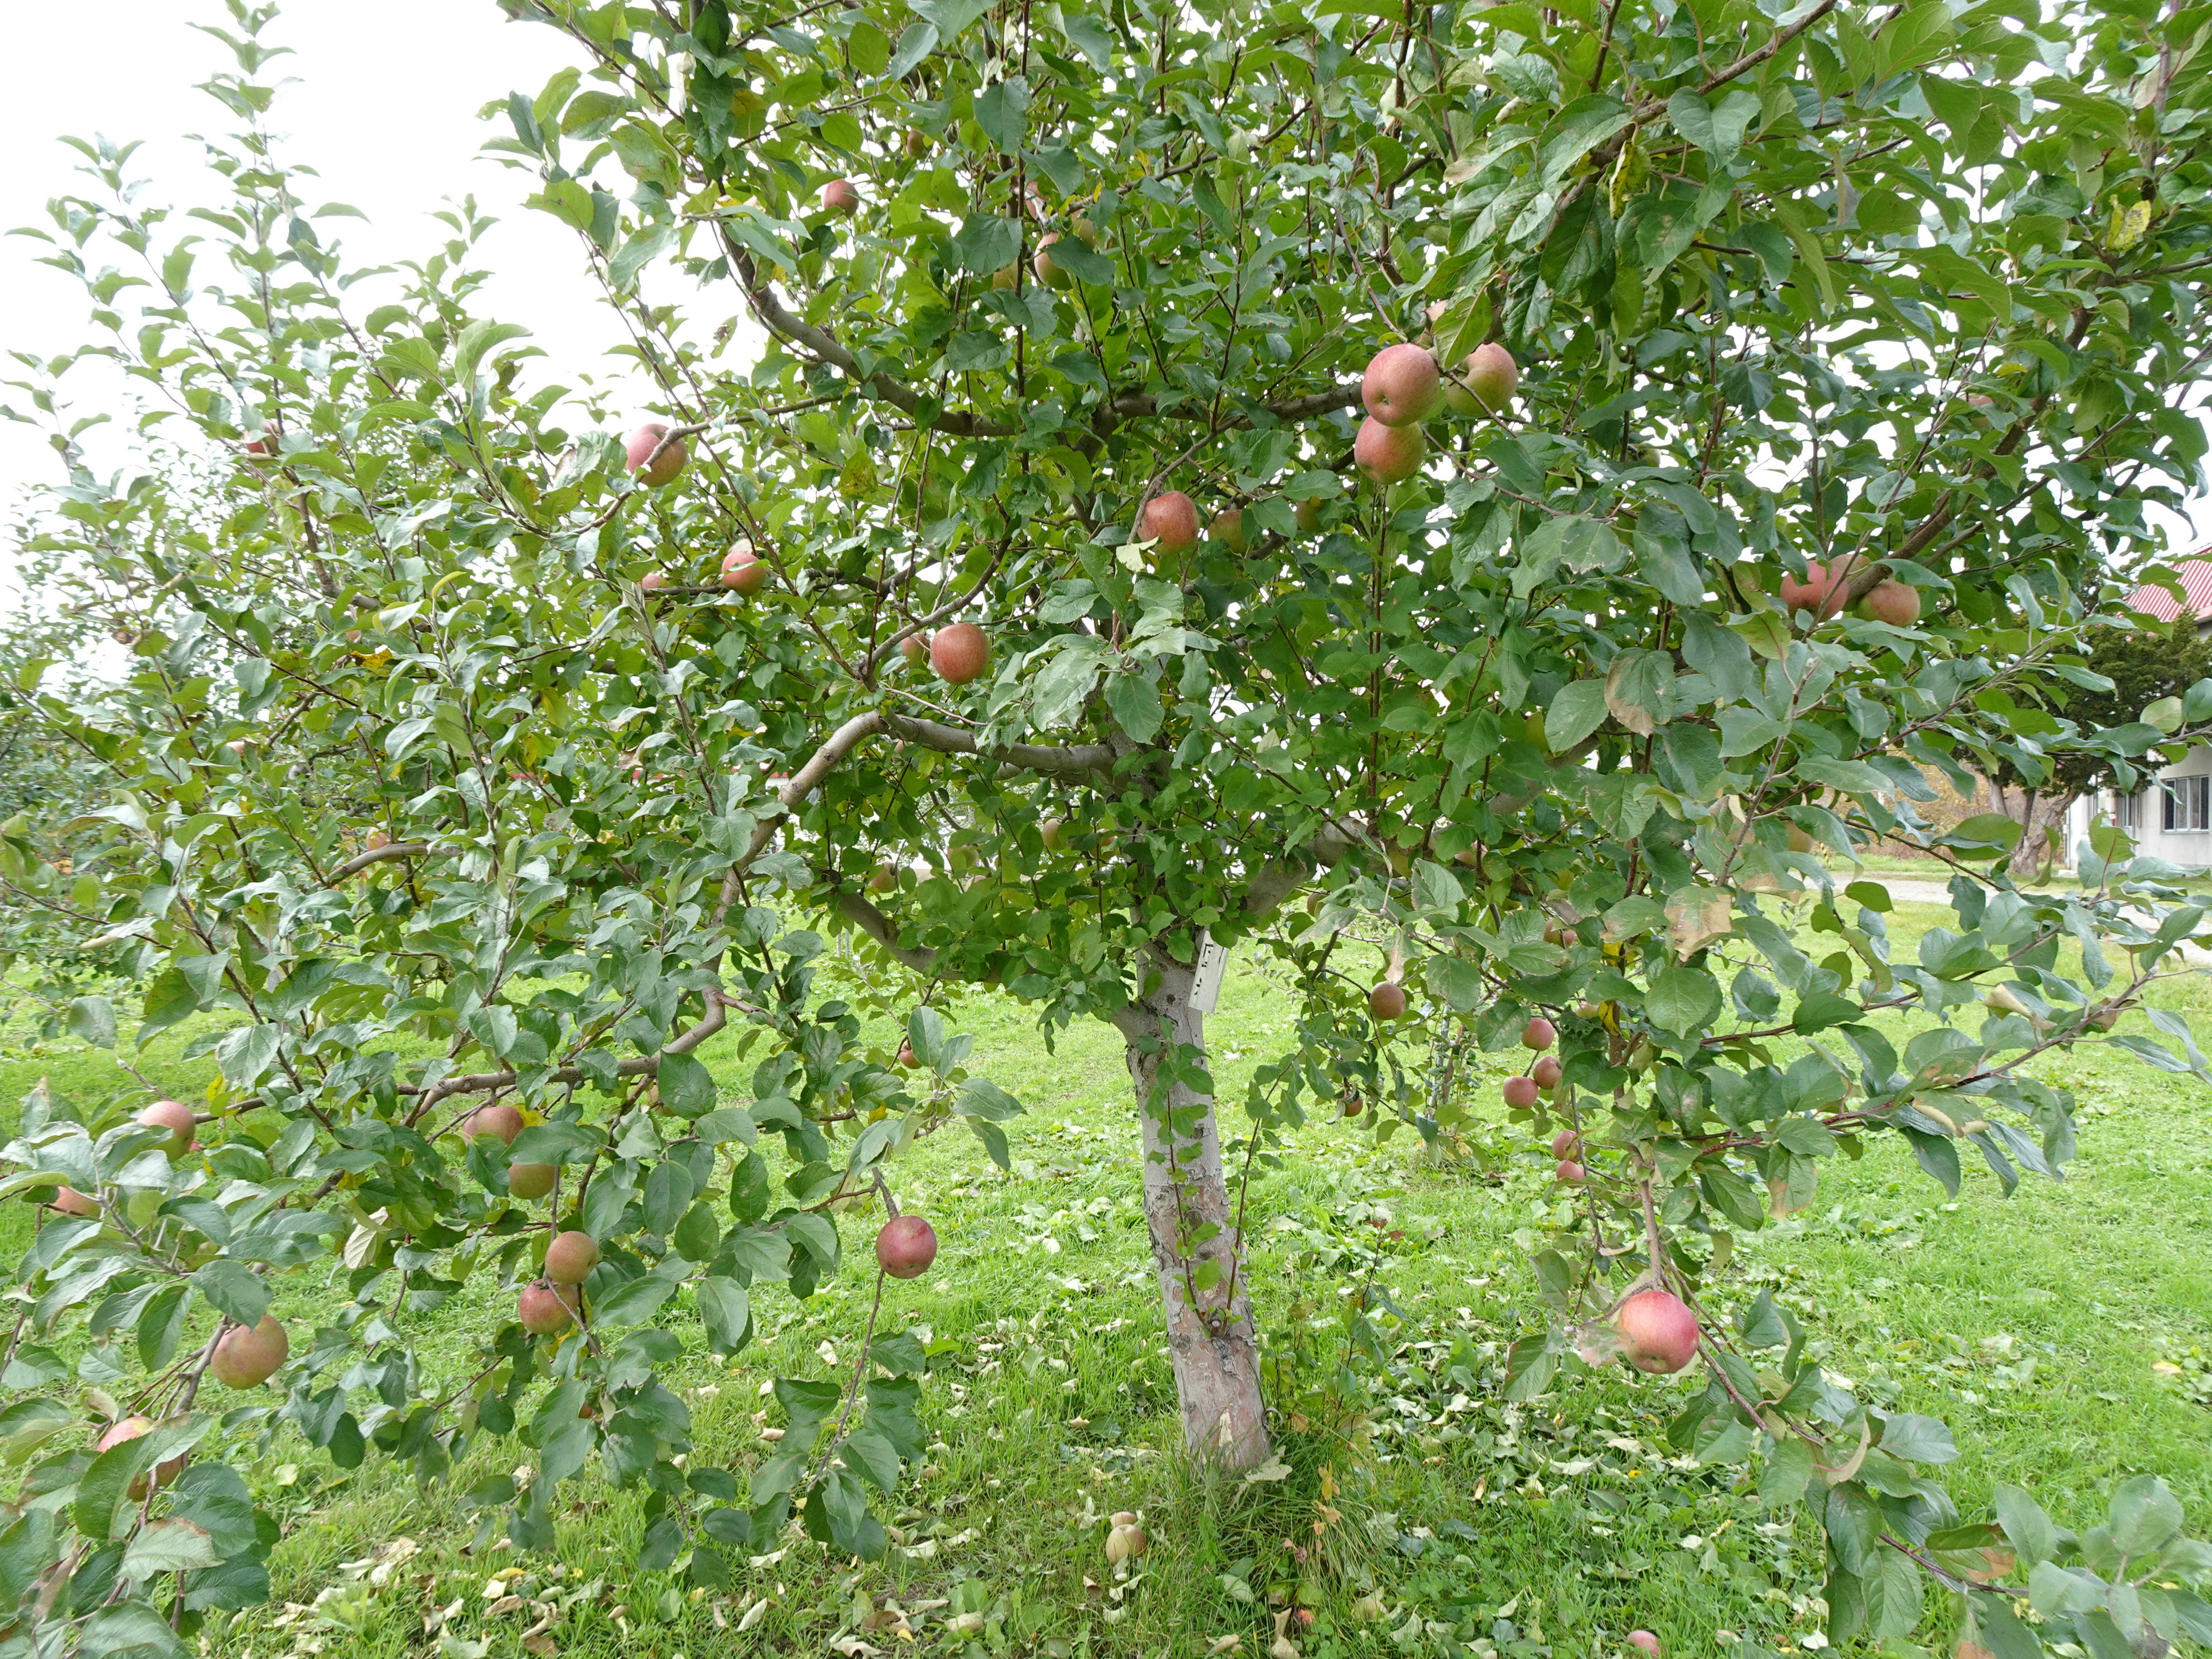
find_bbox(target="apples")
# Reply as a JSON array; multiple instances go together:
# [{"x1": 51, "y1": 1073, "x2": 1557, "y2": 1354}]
[
  {"x1": 1022, "y1": 180, "x2": 1067, "y2": 222},
  {"x1": 720, "y1": 551, "x2": 767, "y2": 595},
  {"x1": 1349, "y1": 774, "x2": 1391, "y2": 810},
  {"x1": 546, "y1": 1230, "x2": 601, "y2": 1287},
  {"x1": 1555, "y1": 1160, "x2": 1586, "y2": 1184},
  {"x1": 92, "y1": 1414, "x2": 184, "y2": 1502},
  {"x1": 1540, "y1": 916, "x2": 1576, "y2": 950},
  {"x1": 1368, "y1": 982, "x2": 1407, "y2": 1021},
  {"x1": 899, "y1": 631, "x2": 931, "y2": 674},
  {"x1": 1305, "y1": 889, "x2": 1337, "y2": 920},
  {"x1": 1616, "y1": 1289, "x2": 1701, "y2": 1376},
  {"x1": 948, "y1": 840, "x2": 980, "y2": 871},
  {"x1": 1293, "y1": 491, "x2": 1339, "y2": 535},
  {"x1": 907, "y1": 125, "x2": 935, "y2": 158},
  {"x1": 1549, "y1": 1128, "x2": 1582, "y2": 1163},
  {"x1": 1134, "y1": 492, "x2": 1200, "y2": 558},
  {"x1": 520, "y1": 1278, "x2": 578, "y2": 1336},
  {"x1": 985, "y1": 260, "x2": 1029, "y2": 303},
  {"x1": 1854, "y1": 580, "x2": 1919, "y2": 633},
  {"x1": 1451, "y1": 840, "x2": 1493, "y2": 871},
  {"x1": 874, "y1": 1215, "x2": 936, "y2": 1280},
  {"x1": 1387, "y1": 824, "x2": 1437, "y2": 881},
  {"x1": 898, "y1": 1038, "x2": 929, "y2": 1071},
  {"x1": 241, "y1": 417, "x2": 285, "y2": 461},
  {"x1": 365, "y1": 818, "x2": 411, "y2": 864},
  {"x1": 1087, "y1": 826, "x2": 1117, "y2": 862},
  {"x1": 821, "y1": 178, "x2": 861, "y2": 223},
  {"x1": 1531, "y1": 1057, "x2": 1572, "y2": 1092},
  {"x1": 1960, "y1": 390, "x2": 2012, "y2": 434},
  {"x1": 644, "y1": 1074, "x2": 686, "y2": 1120},
  {"x1": 1042, "y1": 817, "x2": 1073, "y2": 850},
  {"x1": 134, "y1": 1101, "x2": 196, "y2": 1164},
  {"x1": 460, "y1": 1106, "x2": 524, "y2": 1156},
  {"x1": 1575, "y1": 997, "x2": 1599, "y2": 1027},
  {"x1": 1443, "y1": 339, "x2": 1520, "y2": 419},
  {"x1": 208, "y1": 1314, "x2": 289, "y2": 1393},
  {"x1": 1423, "y1": 299, "x2": 1461, "y2": 337},
  {"x1": 1353, "y1": 409, "x2": 1425, "y2": 485},
  {"x1": 631, "y1": 573, "x2": 670, "y2": 610},
  {"x1": 1523, "y1": 708, "x2": 1563, "y2": 752},
  {"x1": 222, "y1": 738, "x2": 259, "y2": 772},
  {"x1": 1361, "y1": 343, "x2": 1441, "y2": 428},
  {"x1": 1777, "y1": 559, "x2": 1848, "y2": 626},
  {"x1": 45, "y1": 1177, "x2": 102, "y2": 1223},
  {"x1": 1207, "y1": 511, "x2": 1256, "y2": 554},
  {"x1": 624, "y1": 424, "x2": 688, "y2": 490},
  {"x1": 1034, "y1": 231, "x2": 1092, "y2": 295},
  {"x1": 1819, "y1": 550, "x2": 1876, "y2": 590},
  {"x1": 1774, "y1": 818, "x2": 1816, "y2": 859},
  {"x1": 186, "y1": 1139, "x2": 203, "y2": 1161},
  {"x1": 1519, "y1": 1016, "x2": 1554, "y2": 1053},
  {"x1": 564, "y1": 1396, "x2": 595, "y2": 1425},
  {"x1": 506, "y1": 1158, "x2": 559, "y2": 1201},
  {"x1": 1502, "y1": 1075, "x2": 1539, "y2": 1111},
  {"x1": 1334, "y1": 1089, "x2": 1363, "y2": 1118},
  {"x1": 868, "y1": 861, "x2": 904, "y2": 895},
  {"x1": 929, "y1": 621, "x2": 989, "y2": 685}
]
